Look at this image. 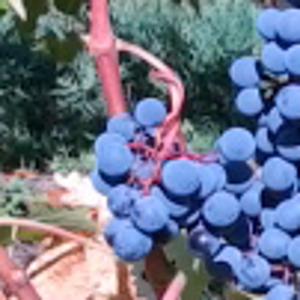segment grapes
Returning a JSON list of instances; mask_svg holds the SVG:
<instances>
[{"label": "grapes", "mask_w": 300, "mask_h": 300, "mask_svg": "<svg viewBox=\"0 0 300 300\" xmlns=\"http://www.w3.org/2000/svg\"><path fill=\"white\" fill-rule=\"evenodd\" d=\"M259 59L235 57L228 78L242 89L236 113L253 133L223 127L214 154L191 150L184 126L160 97L113 115L94 143L90 187L111 221L105 242L140 261L161 240L185 233L206 270L235 276L271 300H297L300 268V8H267L255 19Z\"/></svg>", "instance_id": "obj_1"}]
</instances>
